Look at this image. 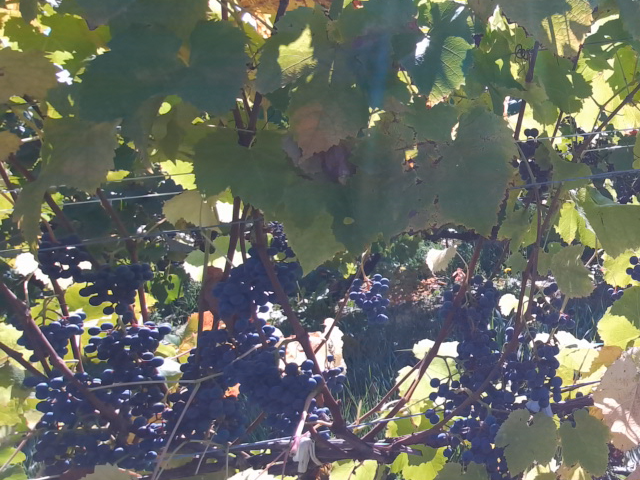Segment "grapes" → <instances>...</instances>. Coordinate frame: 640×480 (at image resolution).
<instances>
[{
  "mask_svg": "<svg viewBox=\"0 0 640 480\" xmlns=\"http://www.w3.org/2000/svg\"><path fill=\"white\" fill-rule=\"evenodd\" d=\"M430 386L432 388L439 387L437 392H431L429 394L430 401H435L438 396L444 397L445 399H449V400H446L444 403V407H445L444 413H443L444 417L447 416L450 413V410H452L459 402H461L466 397H468L467 393H463V392H460L459 394H455L453 390H449V385L447 383H443L440 385V380L437 377H433L430 380Z\"/></svg>",
  "mask_w": 640,
  "mask_h": 480,
  "instance_id": "10",
  "label": "grapes"
},
{
  "mask_svg": "<svg viewBox=\"0 0 640 480\" xmlns=\"http://www.w3.org/2000/svg\"><path fill=\"white\" fill-rule=\"evenodd\" d=\"M139 325L129 326L122 331L116 330L111 323L88 329L91 336L86 353H97L99 360H108L100 375V382L108 385L120 381H164L166 376L155 369L163 363L162 357L154 352L160 347V341L173 330L171 325H159L147 320Z\"/></svg>",
  "mask_w": 640,
  "mask_h": 480,
  "instance_id": "3",
  "label": "grapes"
},
{
  "mask_svg": "<svg viewBox=\"0 0 640 480\" xmlns=\"http://www.w3.org/2000/svg\"><path fill=\"white\" fill-rule=\"evenodd\" d=\"M459 415L467 418L457 419L453 426L449 428L450 434H461L462 440L472 443V447L464 450L462 459L465 463L473 461L476 464H484L488 474L492 478H501L502 474L508 471V464L503 450L492 448L490 443L495 442V435L500 429V425L508 418L507 413L492 411L488 415V410L474 401L460 410Z\"/></svg>",
  "mask_w": 640,
  "mask_h": 480,
  "instance_id": "7",
  "label": "grapes"
},
{
  "mask_svg": "<svg viewBox=\"0 0 640 480\" xmlns=\"http://www.w3.org/2000/svg\"><path fill=\"white\" fill-rule=\"evenodd\" d=\"M425 416L427 419H429L431 424H435L437 421H439V415L436 414V412L432 408H428L426 410Z\"/></svg>",
  "mask_w": 640,
  "mask_h": 480,
  "instance_id": "20",
  "label": "grapes"
},
{
  "mask_svg": "<svg viewBox=\"0 0 640 480\" xmlns=\"http://www.w3.org/2000/svg\"><path fill=\"white\" fill-rule=\"evenodd\" d=\"M251 255L244 264H238L230 271L227 279H220L212 289V295L218 297V315L224 320H232L233 335L225 330H204L197 338L200 346V367L222 375L204 380L197 390L196 396L186 408L177 426L179 434L190 439H200L206 435L211 421L224 417V423L213 436L219 445L233 442L242 437L248 424V418L238 413L236 398H221L224 391L237 385L241 394L250 393V403L260 405L268 415L265 419L267 427H278L286 435H292L305 406L306 396L322 382L340 393L344 388L345 375L343 366L324 369L322 376L312 375L311 360H304L301 369L303 376H298L299 366L288 363L284 367V378H281L279 365L274 354L266 349H254L240 361L228 366L241 353L254 348L262 341L256 331V325L249 319L252 311L250 300L256 302L260 313H268L269 296L264 291H271L266 274L257 257L256 248L247 249Z\"/></svg>",
  "mask_w": 640,
  "mask_h": 480,
  "instance_id": "1",
  "label": "grapes"
},
{
  "mask_svg": "<svg viewBox=\"0 0 640 480\" xmlns=\"http://www.w3.org/2000/svg\"><path fill=\"white\" fill-rule=\"evenodd\" d=\"M373 288L368 292H361L363 280L360 277L354 278L350 282V298L356 302L359 308L365 312V319L369 325H386L388 316L384 311L390 306L388 298H382L381 292L388 290L389 279L375 274L371 281Z\"/></svg>",
  "mask_w": 640,
  "mask_h": 480,
  "instance_id": "8",
  "label": "grapes"
},
{
  "mask_svg": "<svg viewBox=\"0 0 640 480\" xmlns=\"http://www.w3.org/2000/svg\"><path fill=\"white\" fill-rule=\"evenodd\" d=\"M451 446L455 448L460 445L458 437H450L446 433H432L427 436V446L439 449L443 446Z\"/></svg>",
  "mask_w": 640,
  "mask_h": 480,
  "instance_id": "13",
  "label": "grapes"
},
{
  "mask_svg": "<svg viewBox=\"0 0 640 480\" xmlns=\"http://www.w3.org/2000/svg\"><path fill=\"white\" fill-rule=\"evenodd\" d=\"M544 303L545 300L542 296H539L537 298V302L534 301L533 303V309L531 313L533 315H536V320L538 322L542 321L545 325L549 324V326L553 329L561 326L565 327L566 329H573L576 326V322L573 319H568L567 317H563L562 319H560L557 313H551L550 315L543 314V309L537 306L538 304L543 305Z\"/></svg>",
  "mask_w": 640,
  "mask_h": 480,
  "instance_id": "11",
  "label": "grapes"
},
{
  "mask_svg": "<svg viewBox=\"0 0 640 480\" xmlns=\"http://www.w3.org/2000/svg\"><path fill=\"white\" fill-rule=\"evenodd\" d=\"M258 322L262 324V332L265 333V340L270 342H280L281 337L278 335H274L276 332V327L273 324H267V322L263 318H259Z\"/></svg>",
  "mask_w": 640,
  "mask_h": 480,
  "instance_id": "19",
  "label": "grapes"
},
{
  "mask_svg": "<svg viewBox=\"0 0 640 480\" xmlns=\"http://www.w3.org/2000/svg\"><path fill=\"white\" fill-rule=\"evenodd\" d=\"M278 283L286 295L293 294L296 290L297 275L292 271L298 270V263L290 261L286 267L275 266Z\"/></svg>",
  "mask_w": 640,
  "mask_h": 480,
  "instance_id": "12",
  "label": "grapes"
},
{
  "mask_svg": "<svg viewBox=\"0 0 640 480\" xmlns=\"http://www.w3.org/2000/svg\"><path fill=\"white\" fill-rule=\"evenodd\" d=\"M42 242L39 244V247L44 246H53L57 244H76L80 243L81 239L77 234H74L72 237H67V239H59L58 242L52 241L48 233H43L41 235Z\"/></svg>",
  "mask_w": 640,
  "mask_h": 480,
  "instance_id": "18",
  "label": "grapes"
},
{
  "mask_svg": "<svg viewBox=\"0 0 640 480\" xmlns=\"http://www.w3.org/2000/svg\"><path fill=\"white\" fill-rule=\"evenodd\" d=\"M535 346L537 347V356L544 359H540L538 364L528 362L527 359L520 363L517 354L512 352L507 359V367H502L491 380L496 382L500 377L504 381L511 379L512 392H508L506 389L497 391L492 384H489L485 389L488 396L483 398L484 402L491 404L492 408L506 410L507 404H513L516 401V395L513 392H516L518 396L525 394V389L518 381H528V387L532 388V392L528 393L527 397L531 401H538L540 408L549 406L551 387L553 388L554 402H561L562 388L560 386L563 384V380L561 377H556L560 361L555 357L560 354V349L549 346L541 340H536Z\"/></svg>",
  "mask_w": 640,
  "mask_h": 480,
  "instance_id": "5",
  "label": "grapes"
},
{
  "mask_svg": "<svg viewBox=\"0 0 640 480\" xmlns=\"http://www.w3.org/2000/svg\"><path fill=\"white\" fill-rule=\"evenodd\" d=\"M278 252H285L288 258H294L295 253L287 243H282L280 238L271 239V248L267 249L268 256H274Z\"/></svg>",
  "mask_w": 640,
  "mask_h": 480,
  "instance_id": "17",
  "label": "grapes"
},
{
  "mask_svg": "<svg viewBox=\"0 0 640 480\" xmlns=\"http://www.w3.org/2000/svg\"><path fill=\"white\" fill-rule=\"evenodd\" d=\"M480 294H484L479 299V303H473L466 308V314L473 318V331H466L457 336L460 343L456 352L461 359H469L464 362L466 370H474L473 373L461 375L458 380L451 381L452 388L467 387L470 391H474L481 384L482 379L494 367L498 359L499 353H491V350H497L499 344L495 338L497 332L495 329L487 330L493 308L497 300L501 297V292L497 291L492 281H485L478 288Z\"/></svg>",
  "mask_w": 640,
  "mask_h": 480,
  "instance_id": "6",
  "label": "grapes"
},
{
  "mask_svg": "<svg viewBox=\"0 0 640 480\" xmlns=\"http://www.w3.org/2000/svg\"><path fill=\"white\" fill-rule=\"evenodd\" d=\"M25 387H35V398L39 401L35 404L38 412L45 413L40 422L35 424L37 429L46 428L40 434V443L35 445V453L32 455L34 462H42L49 465L45 473L49 476L63 474L72 465L73 461L78 466H98L99 464L113 465L116 459L118 467L124 470H136L150 472L154 469V460L157 458L159 448L167 443V436L172 426L181 415L185 402L194 391V384L182 382V387H188L183 394L173 392L168 400L174 403L173 410L165 411L166 406L160 402L168 393V387L156 382L147 389V394L138 391L134 396L130 389L124 386L114 388L110 393L106 389H100L95 395L101 402L109 404L111 408L122 409L126 418L132 420L133 426L139 433L150 436L137 444L116 446L112 449L99 441H108L109 432L105 434L83 435L82 433H64L62 437L55 435L57 425L53 421H63L75 426L77 416L80 414H92L93 406L87 402L78 390L56 370H52L48 377L39 379L37 376H28L23 380ZM85 446L84 452H77L73 460L68 457L65 450L74 445Z\"/></svg>",
  "mask_w": 640,
  "mask_h": 480,
  "instance_id": "2",
  "label": "grapes"
},
{
  "mask_svg": "<svg viewBox=\"0 0 640 480\" xmlns=\"http://www.w3.org/2000/svg\"><path fill=\"white\" fill-rule=\"evenodd\" d=\"M87 318L88 315L85 312L75 310L66 317L62 316L57 321H50L47 325H42L47 340L60 357L68 353L69 339L84 334L82 326Z\"/></svg>",
  "mask_w": 640,
  "mask_h": 480,
  "instance_id": "9",
  "label": "grapes"
},
{
  "mask_svg": "<svg viewBox=\"0 0 640 480\" xmlns=\"http://www.w3.org/2000/svg\"><path fill=\"white\" fill-rule=\"evenodd\" d=\"M89 254L78 249H59L53 251L38 252L39 263L42 264V272L45 276L54 279H68L73 276L77 283L95 282L86 288L79 290V295L87 297L98 293L89 299L91 307H98L103 302L111 301L119 303L115 308L108 305L103 309L105 316L116 313L125 323L132 320V312L129 305L134 303L138 285L144 281H151L153 273L148 264L119 265L116 270L110 266H103L96 271V276L91 270H79L81 262H86Z\"/></svg>",
  "mask_w": 640,
  "mask_h": 480,
  "instance_id": "4",
  "label": "grapes"
},
{
  "mask_svg": "<svg viewBox=\"0 0 640 480\" xmlns=\"http://www.w3.org/2000/svg\"><path fill=\"white\" fill-rule=\"evenodd\" d=\"M460 284L457 285H453L452 286V291L451 290H445L443 293V301H442V305L443 308L438 312V316L440 318H445L448 316V314L450 313V309L453 308L455 302H454V293H457L460 289Z\"/></svg>",
  "mask_w": 640,
  "mask_h": 480,
  "instance_id": "14",
  "label": "grapes"
},
{
  "mask_svg": "<svg viewBox=\"0 0 640 480\" xmlns=\"http://www.w3.org/2000/svg\"><path fill=\"white\" fill-rule=\"evenodd\" d=\"M197 349L192 348L190 351V355L188 356V362L180 366V371L183 374L180 375L181 380H194V368L197 366V361L195 360Z\"/></svg>",
  "mask_w": 640,
  "mask_h": 480,
  "instance_id": "15",
  "label": "grapes"
},
{
  "mask_svg": "<svg viewBox=\"0 0 640 480\" xmlns=\"http://www.w3.org/2000/svg\"><path fill=\"white\" fill-rule=\"evenodd\" d=\"M307 411L309 414L306 415V420L311 422L317 421L323 415L329 416L331 414L330 409L328 407H321L315 398L311 399V404L307 407Z\"/></svg>",
  "mask_w": 640,
  "mask_h": 480,
  "instance_id": "16",
  "label": "grapes"
}]
</instances>
